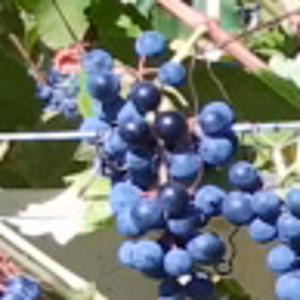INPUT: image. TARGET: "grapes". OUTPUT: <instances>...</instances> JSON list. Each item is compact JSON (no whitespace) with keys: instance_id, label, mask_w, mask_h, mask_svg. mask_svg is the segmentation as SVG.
<instances>
[{"instance_id":"obj_1","label":"grapes","mask_w":300,"mask_h":300,"mask_svg":"<svg viewBox=\"0 0 300 300\" xmlns=\"http://www.w3.org/2000/svg\"><path fill=\"white\" fill-rule=\"evenodd\" d=\"M110 53H85L81 69L94 116L80 122L84 140L98 146L96 166L113 186L109 202L114 232L123 241L124 267L146 278L162 277L161 300H208L225 245L218 234L201 231L223 217L249 226L255 245L275 241L269 267L280 273L273 285L278 300H300V187L279 194L265 189L257 167L236 161L242 147L237 114L226 99L200 105L184 83L183 63L167 60L156 76L130 85L125 96L112 72ZM226 169L233 191L204 185L207 167Z\"/></svg>"},{"instance_id":"obj_2","label":"grapes","mask_w":300,"mask_h":300,"mask_svg":"<svg viewBox=\"0 0 300 300\" xmlns=\"http://www.w3.org/2000/svg\"><path fill=\"white\" fill-rule=\"evenodd\" d=\"M40 295L38 284L30 277L20 275L6 281L0 291V300H37Z\"/></svg>"},{"instance_id":"obj_3","label":"grapes","mask_w":300,"mask_h":300,"mask_svg":"<svg viewBox=\"0 0 300 300\" xmlns=\"http://www.w3.org/2000/svg\"><path fill=\"white\" fill-rule=\"evenodd\" d=\"M168 43L164 35L158 32H145L134 43L136 54L146 59H156L166 53Z\"/></svg>"}]
</instances>
